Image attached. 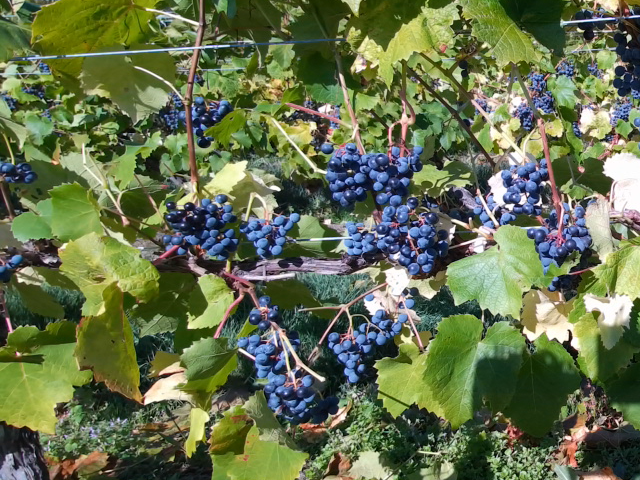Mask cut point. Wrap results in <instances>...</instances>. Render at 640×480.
Segmentation results:
<instances>
[{"label": "cut point", "mask_w": 640, "mask_h": 480, "mask_svg": "<svg viewBox=\"0 0 640 480\" xmlns=\"http://www.w3.org/2000/svg\"><path fill=\"white\" fill-rule=\"evenodd\" d=\"M345 311L347 313L348 326H351V324H352V318L351 317L366 318L365 314H350V307L346 308Z\"/></svg>", "instance_id": "6a23745f"}, {"label": "cut point", "mask_w": 640, "mask_h": 480, "mask_svg": "<svg viewBox=\"0 0 640 480\" xmlns=\"http://www.w3.org/2000/svg\"><path fill=\"white\" fill-rule=\"evenodd\" d=\"M279 339H280V342H281V350H282V352L284 353L285 360H288V354H287V351L285 350V347H284V339H283V337L280 335V333H279Z\"/></svg>", "instance_id": "deb38ca7"}, {"label": "cut point", "mask_w": 640, "mask_h": 480, "mask_svg": "<svg viewBox=\"0 0 640 480\" xmlns=\"http://www.w3.org/2000/svg\"><path fill=\"white\" fill-rule=\"evenodd\" d=\"M537 132V128L535 127L531 133L529 134L528 138L525 140L524 144H523V148H526V146L528 145L529 141H531L532 136Z\"/></svg>", "instance_id": "7d7e1d6f"}]
</instances>
